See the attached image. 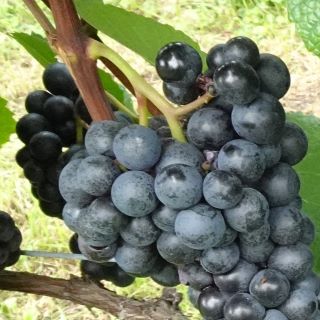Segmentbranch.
<instances>
[{"instance_id": "obj_3", "label": "branch", "mask_w": 320, "mask_h": 320, "mask_svg": "<svg viewBox=\"0 0 320 320\" xmlns=\"http://www.w3.org/2000/svg\"><path fill=\"white\" fill-rule=\"evenodd\" d=\"M147 110L155 117L164 115L149 99L146 101Z\"/></svg>"}, {"instance_id": "obj_1", "label": "branch", "mask_w": 320, "mask_h": 320, "mask_svg": "<svg viewBox=\"0 0 320 320\" xmlns=\"http://www.w3.org/2000/svg\"><path fill=\"white\" fill-rule=\"evenodd\" d=\"M23 1L43 28L52 48L61 52L92 121L119 122L101 85L96 61L86 54L89 38L102 42L97 29L82 18L79 20L73 0H41L51 10L57 29L35 0Z\"/></svg>"}, {"instance_id": "obj_2", "label": "branch", "mask_w": 320, "mask_h": 320, "mask_svg": "<svg viewBox=\"0 0 320 320\" xmlns=\"http://www.w3.org/2000/svg\"><path fill=\"white\" fill-rule=\"evenodd\" d=\"M105 65H107L111 71L116 75V77L137 97L135 90L133 89L131 83L127 79V77L115 66L112 62H110L106 57L100 58Z\"/></svg>"}]
</instances>
